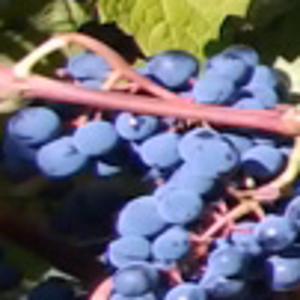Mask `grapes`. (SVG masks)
Here are the masks:
<instances>
[{
    "mask_svg": "<svg viewBox=\"0 0 300 300\" xmlns=\"http://www.w3.org/2000/svg\"><path fill=\"white\" fill-rule=\"evenodd\" d=\"M120 143L140 179L159 184L114 215L109 300H236L248 291L252 259L273 289L300 282V181L285 198L264 194L292 154L273 134L217 133L190 118L106 109L63 121L31 107L8 120L2 163L14 183L73 181L87 167L107 182L122 172L112 156Z\"/></svg>",
    "mask_w": 300,
    "mask_h": 300,
    "instance_id": "01657485",
    "label": "grapes"
},
{
    "mask_svg": "<svg viewBox=\"0 0 300 300\" xmlns=\"http://www.w3.org/2000/svg\"><path fill=\"white\" fill-rule=\"evenodd\" d=\"M67 72L80 85H97L107 91L122 89L236 109L271 110L280 102L276 72L261 62L255 48L245 44L226 47L199 72L197 58L182 50L156 54L139 70L113 67L102 51L78 53L68 60Z\"/></svg>",
    "mask_w": 300,
    "mask_h": 300,
    "instance_id": "b958b902",
    "label": "grapes"
}]
</instances>
